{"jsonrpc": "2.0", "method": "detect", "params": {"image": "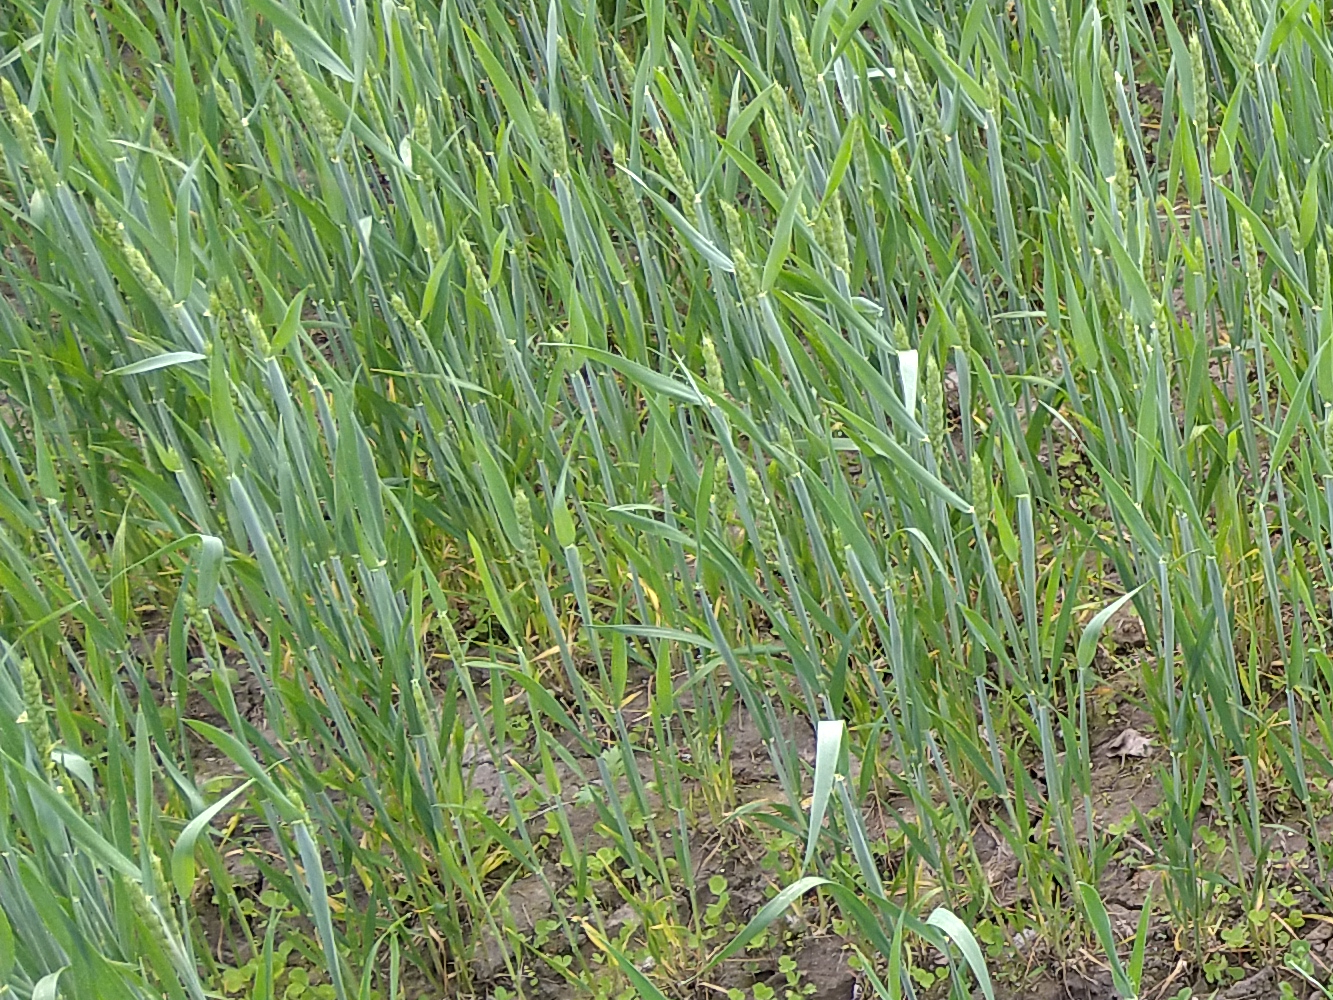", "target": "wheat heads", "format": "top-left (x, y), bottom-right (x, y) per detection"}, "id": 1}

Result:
top-left (1325, 413), bottom-right (1333, 476)
top-left (745, 464), bottom-right (777, 557)
top-left (512, 493), bottom-right (542, 585)
top-left (852, 128), bottom-right (870, 200)
top-left (420, 14), bottom-right (438, 75)
top-left (218, 277), bottom-right (256, 352)
top-left (18, 657), bottom-right (53, 784)
top-left (1143, 219), bottom-right (1152, 281)
top-left (412, 676), bottom-right (430, 726)
top-left (121, 875), bottom-right (175, 971)
top-left (1062, 196), bottom-right (1082, 260)
top-left (1115, 309), bottom-right (1144, 373)
top-left (441, 92), bottom-right (457, 148)
top-left (334, 116), bottom-right (356, 185)
top-left (693, 96), bottom-right (712, 144)
top-left (495, 0), bottom-right (534, 22)
top-left (1194, 236), bottom-right (1208, 275)
top-left (425, 219), bottom-right (437, 267)
top-left (441, 612), bottom-right (461, 664)
top-left (1100, 275), bottom-right (1122, 331)
top-left (404, 0), bottom-right (416, 42)
top-left (888, 146), bottom-right (912, 205)
top-left (934, 32), bottom-right (947, 60)
top-left (1210, 0), bottom-right (1253, 92)
top-left (1049, 0), bottom-right (1070, 74)
top-left (388, 291), bottom-right (432, 349)
top-left (702, 339), bottom-right (727, 408)
top-left (0, 521), bottom-right (48, 573)
top-left (613, 148), bottom-right (646, 243)
top-left (205, 294), bottom-right (237, 356)
top-left (417, 106), bottom-right (437, 198)
top-left (607, 41), bottom-right (646, 112)
top-left (273, 31), bottom-right (339, 157)
top-left (894, 47), bottom-right (906, 86)
top-left (208, 442), bottom-right (227, 475)
top-left (711, 455), bottom-right (730, 527)
top-left (286, 629), bottom-right (306, 670)
top-left (955, 305), bottom-right (970, 356)
top-left (416, 740), bottom-right (443, 799)
top-left (246, 308), bottom-right (281, 357)
top-left (108, 798), bottom-right (145, 855)
top-left (907, 50), bottom-right (945, 156)
top-left (1049, 108), bottom-right (1071, 193)
top-left (359, 71), bottom-right (387, 141)
top-left (544, 115), bottom-right (567, 174)
top-left (1277, 173), bottom-right (1294, 247)
top-left (972, 453), bottom-right (987, 534)
top-left (96, 198), bottom-right (173, 315)
top-left (928, 357), bottom-right (943, 472)
top-left (58, 767), bottom-right (82, 820)
top-left (828, 184), bottom-right (849, 272)
top-left (1104, 0), bottom-right (1117, 33)
top-left (467, 145), bottom-right (502, 201)
top-left (1188, 30), bottom-right (1209, 149)
top-left (213, 78), bottom-right (246, 142)
top-left (45, 500), bottom-right (78, 569)
top-left (1151, 299), bottom-right (1171, 380)
top-left (1239, 219), bottom-right (1257, 317)
top-left (833, 519), bottom-right (856, 591)
top-left (42, 430), bottom-right (69, 490)
top-left (662, 129), bottom-right (703, 201)
top-left (1096, 41), bottom-right (1112, 91)
top-left (267, 534), bottom-right (295, 603)
top-left (515, 237), bottom-right (523, 271)
top-left (985, 68), bottom-right (1000, 116)
top-left (252, 50), bottom-right (287, 142)
top-left (47, 372), bottom-right (100, 463)
top-left (892, 320), bottom-right (911, 356)
top-left (1223, 0), bottom-right (1262, 53)
top-left (1326, 226), bottom-right (1333, 294)
top-left (181, 593), bottom-right (222, 672)
top-left (459, 237), bottom-right (489, 291)
top-left (553, 35), bottom-right (585, 107)
top-left (771, 83), bottom-right (795, 152)
top-left (787, 25), bottom-right (824, 133)
top-left (1113, 135), bottom-right (1133, 224)
top-left (1315, 245), bottom-right (1329, 310)
top-left (765, 111), bottom-right (814, 176)
top-left (810, 207), bottom-right (829, 282)
top-left (139, 850), bottom-right (181, 944)
top-left (529, 104), bottom-right (556, 170)
top-left (1, 76), bottom-right (44, 195)
top-left (721, 202), bottom-right (751, 297)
